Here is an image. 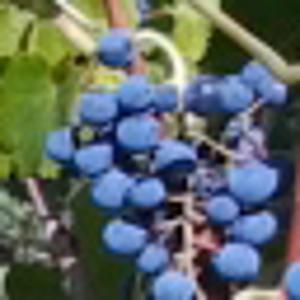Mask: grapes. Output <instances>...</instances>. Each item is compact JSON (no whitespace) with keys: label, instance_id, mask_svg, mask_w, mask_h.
<instances>
[{"label":"grapes","instance_id":"1","mask_svg":"<svg viewBox=\"0 0 300 300\" xmlns=\"http://www.w3.org/2000/svg\"><path fill=\"white\" fill-rule=\"evenodd\" d=\"M290 102L285 80L249 61L239 74L194 75L185 83L122 81L88 92L79 121L43 138L48 159L71 163L87 197L106 210L103 249L157 277L154 300H189L195 284H256L261 250L277 238L269 209L294 176L286 156L269 153L272 134L248 110Z\"/></svg>","mask_w":300,"mask_h":300},{"label":"grapes","instance_id":"2","mask_svg":"<svg viewBox=\"0 0 300 300\" xmlns=\"http://www.w3.org/2000/svg\"><path fill=\"white\" fill-rule=\"evenodd\" d=\"M134 43L127 29H110L98 42V59L109 70L125 69L134 61Z\"/></svg>","mask_w":300,"mask_h":300},{"label":"grapes","instance_id":"3","mask_svg":"<svg viewBox=\"0 0 300 300\" xmlns=\"http://www.w3.org/2000/svg\"><path fill=\"white\" fill-rule=\"evenodd\" d=\"M282 296L285 300H300V264L291 267L285 276Z\"/></svg>","mask_w":300,"mask_h":300}]
</instances>
